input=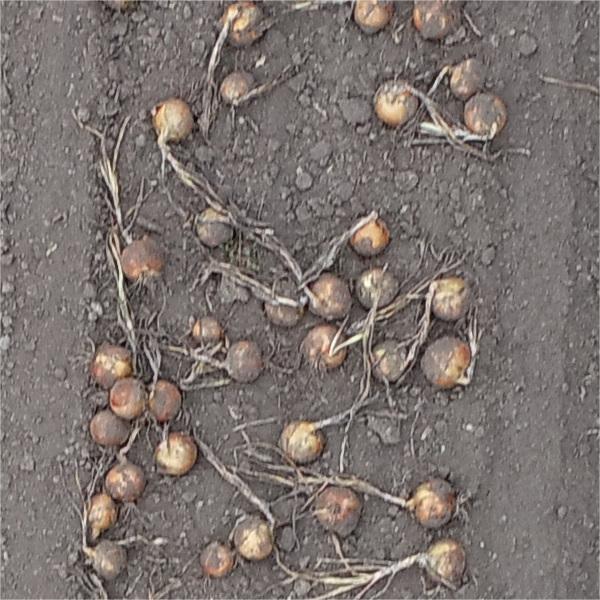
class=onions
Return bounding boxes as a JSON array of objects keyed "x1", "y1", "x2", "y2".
[
  {"x1": 351, "y1": 3, "x2": 391, "y2": 31},
  {"x1": 441, "y1": 57, "x2": 481, "y2": 97},
  {"x1": 413, "y1": 0, "x2": 457, "y2": 38},
  {"x1": 219, "y1": 4, "x2": 263, "y2": 44},
  {"x1": 89, "y1": 410, "x2": 127, "y2": 446},
  {"x1": 93, "y1": 345, "x2": 133, "y2": 384},
  {"x1": 224, "y1": 338, "x2": 263, "y2": 381},
  {"x1": 279, "y1": 420, "x2": 323, "y2": 462},
  {"x1": 146, "y1": 380, "x2": 181, "y2": 419},
  {"x1": 348, "y1": 214, "x2": 388, "y2": 253},
  {"x1": 194, "y1": 208, "x2": 233, "y2": 245},
  {"x1": 306, "y1": 274, "x2": 348, "y2": 318},
  {"x1": 301, "y1": 324, "x2": 347, "y2": 367},
  {"x1": 424, "y1": 536, "x2": 465, "y2": 582},
  {"x1": 430, "y1": 275, "x2": 468, "y2": 319},
  {"x1": 189, "y1": 314, "x2": 222, "y2": 346},
  {"x1": 151, "y1": 99, "x2": 193, "y2": 141},
  {"x1": 218, "y1": 69, "x2": 251, "y2": 103},
  {"x1": 104, "y1": 460, "x2": 145, "y2": 500},
  {"x1": 198, "y1": 541, "x2": 235, "y2": 578},
  {"x1": 84, "y1": 541, "x2": 122, "y2": 577},
  {"x1": 232, "y1": 518, "x2": 270, "y2": 559},
  {"x1": 367, "y1": 338, "x2": 412, "y2": 380},
  {"x1": 462, "y1": 94, "x2": 506, "y2": 136},
  {"x1": 408, "y1": 477, "x2": 454, "y2": 526},
  {"x1": 267, "y1": 292, "x2": 301, "y2": 326},
  {"x1": 311, "y1": 486, "x2": 357, "y2": 532},
  {"x1": 84, "y1": 495, "x2": 117, "y2": 535},
  {"x1": 419, "y1": 336, "x2": 472, "y2": 386},
  {"x1": 353, "y1": 266, "x2": 393, "y2": 306},
  {"x1": 109, "y1": 379, "x2": 144, "y2": 416},
  {"x1": 154, "y1": 431, "x2": 193, "y2": 474},
  {"x1": 372, "y1": 83, "x2": 411, "y2": 124},
  {"x1": 119, "y1": 237, "x2": 165, "y2": 282}
]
